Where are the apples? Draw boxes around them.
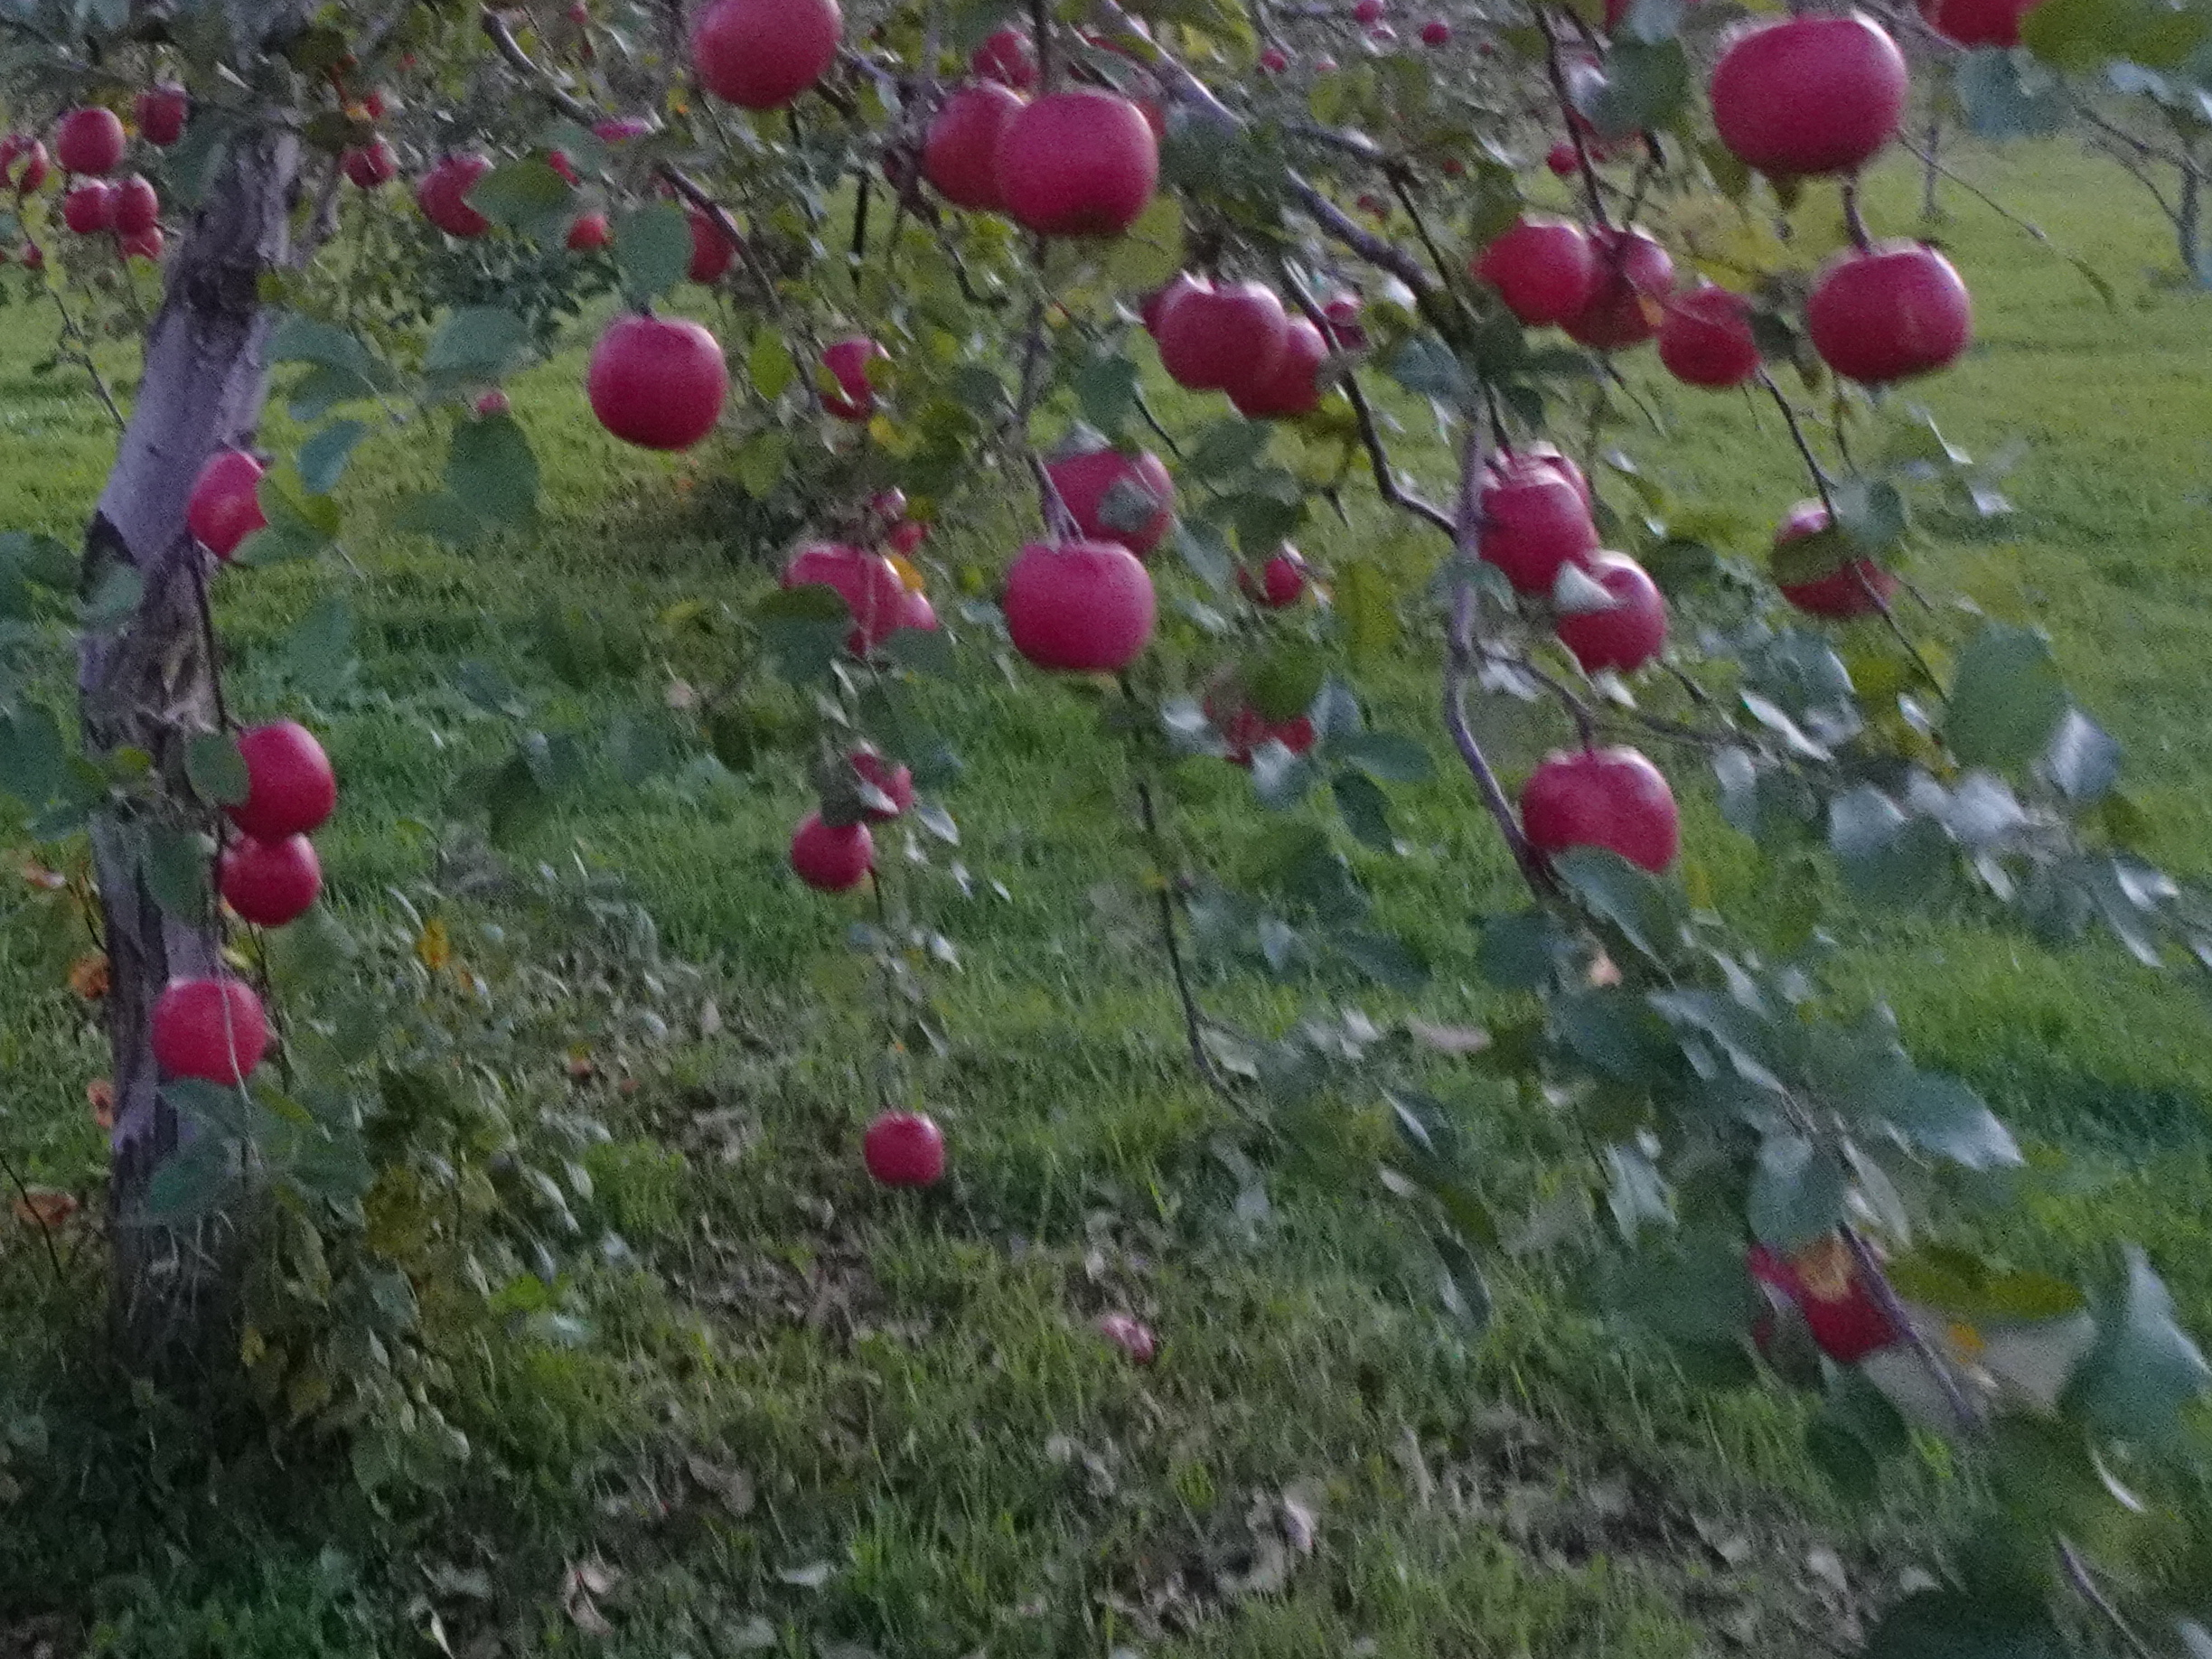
[887,521,922,556]
[1477,478,1589,602]
[120,226,163,260]
[134,87,186,145]
[1557,232,1676,352]
[973,29,1035,89]
[64,187,114,234]
[1224,317,1331,421]
[1906,0,2067,48]
[1745,1241,1899,1363]
[104,176,158,236]
[1238,556,1303,608]
[549,150,581,186]
[419,157,491,237]
[1045,448,1167,558]
[684,212,733,285]
[792,812,873,890]
[1469,218,1590,332]
[903,591,936,632]
[847,751,912,821]
[597,126,642,143]
[215,831,321,928]
[1658,286,1756,389]
[1577,0,1705,31]
[784,546,905,657]
[1476,444,1553,486]
[1711,19,1907,176]
[820,337,892,419]
[148,979,267,1087]
[343,141,394,187]
[1314,301,1353,353]
[692,0,842,110]
[56,107,125,176]
[185,451,269,561]
[1066,35,1165,137]
[997,93,1158,237]
[1554,556,1663,675]
[1522,753,1679,877]
[922,83,1025,211]
[1158,284,1287,392]
[1003,540,1156,676]
[223,721,334,841]
[586,317,726,450]
[1803,253,1970,382]
[1774,509,1893,621]
[863,1111,944,1192]
[1139,273,1178,343]
[871,492,904,518]
[566,214,607,249]
[1544,455,1588,515]
[0,241,43,268]
[0,134,48,194]
[1204,689,1313,769]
